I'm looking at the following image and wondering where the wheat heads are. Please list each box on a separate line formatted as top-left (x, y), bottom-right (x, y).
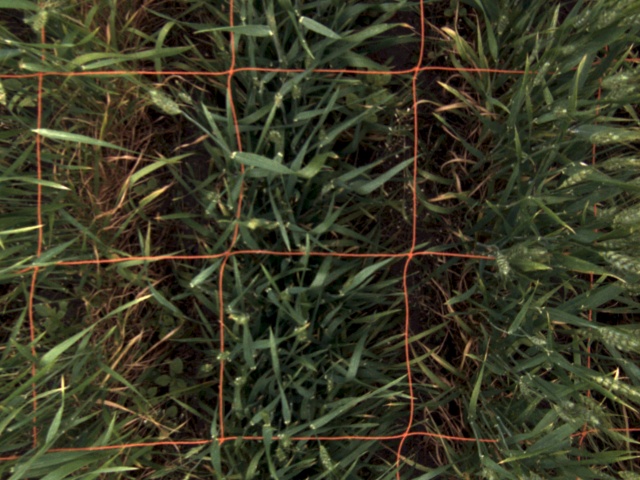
top-left (598, 13), bottom-right (613, 28)
top-left (602, 72), bottom-right (626, 89)
top-left (529, 334), bottom-right (547, 348)
top-left (597, 326), bottom-right (639, 353)
top-left (591, 131), bottom-right (636, 143)
top-left (536, 64), bottom-right (550, 88)
top-left (33, 11), bottom-right (48, 29)
top-left (238, 316), bottom-right (251, 324)
top-left (613, 209), bottom-right (640, 225)
top-left (591, 376), bottom-right (638, 400)
top-left (559, 170), bottom-right (591, 189)
top-left (601, 156), bottom-right (633, 168)
top-left (605, 87), bottom-right (632, 103)
top-left (269, 131), bottom-right (284, 144)
top-left (149, 91), bottom-right (179, 116)
top-left (599, 251), bottom-right (638, 277)
top-left (494, 253), bottom-right (509, 275)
